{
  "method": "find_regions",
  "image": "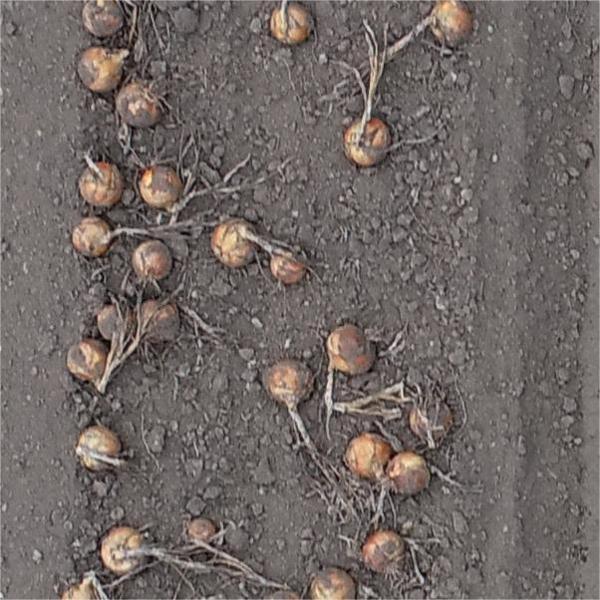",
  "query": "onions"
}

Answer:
[409,404,449,443]
[138,164,181,207]
[62,576,106,600]
[71,215,111,255]
[118,83,161,126]
[79,160,120,205]
[324,325,371,372]
[129,240,168,280]
[82,0,123,36]
[77,46,122,91]
[305,566,354,599]
[359,527,405,571]
[429,1,472,44]
[345,434,390,478]
[262,358,313,404]
[99,525,144,571]
[98,304,122,338]
[343,117,389,165]
[65,340,108,383]
[268,3,312,42]
[77,423,120,470]
[270,251,304,285]
[212,220,258,265]
[136,299,179,344]
[386,450,427,493]
[187,516,215,544]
